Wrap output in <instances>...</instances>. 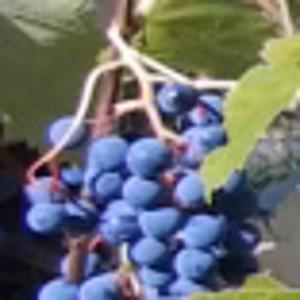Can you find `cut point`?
<instances>
[{
	"mask_svg": "<svg viewBox=\"0 0 300 300\" xmlns=\"http://www.w3.org/2000/svg\"><path fill=\"white\" fill-rule=\"evenodd\" d=\"M106 34L113 39L117 50L123 58L112 59L111 61L101 63L91 74L88 83L84 86L77 108L75 109V115L77 117H82L86 113L93 91L96 89L99 80L104 77L105 73L122 67H130L131 71L134 73L139 82L142 99H129L126 102L119 103L117 105V112L119 114H124L126 111H131L134 108H145L146 110H149L151 105L148 96L149 82L140 65L159 72L174 82L182 83L197 89L225 90L227 88V83L225 81H207L179 73L163 63L142 55L131 47H127L117 22H112L110 26L106 28Z\"/></svg>",
	"mask_w": 300,
	"mask_h": 300,
	"instance_id": "1",
	"label": "cut point"
}]
</instances>
